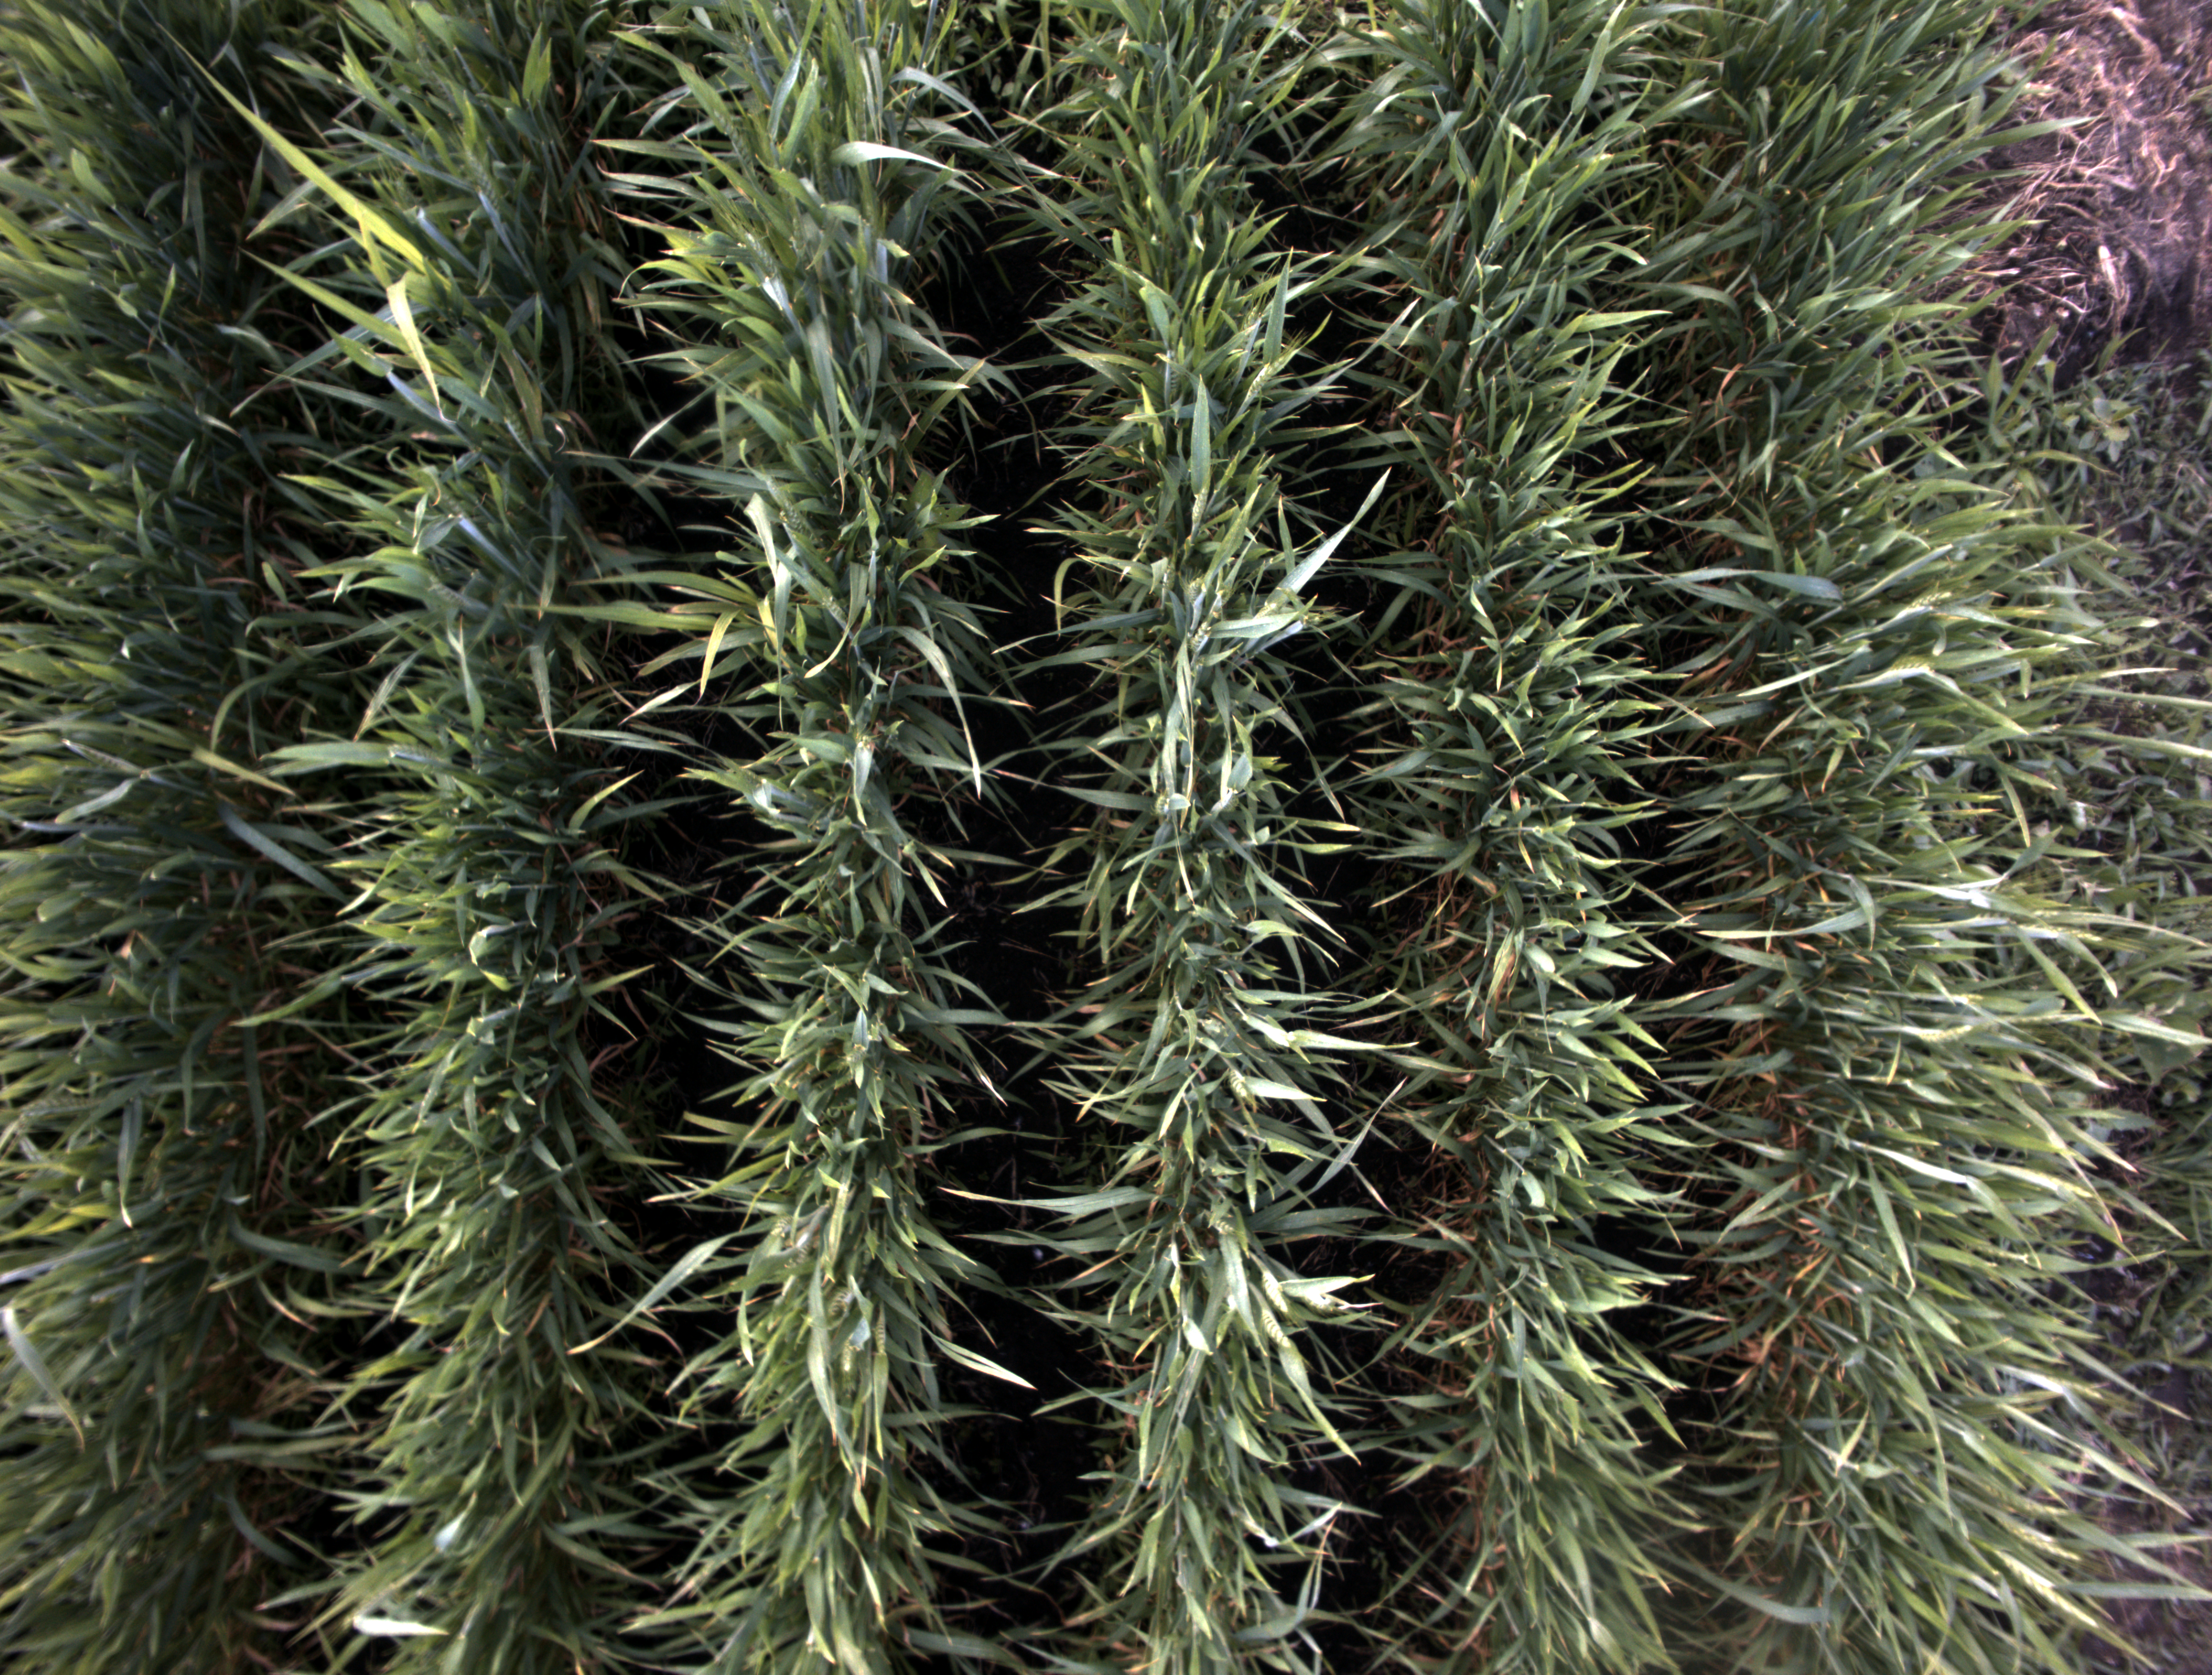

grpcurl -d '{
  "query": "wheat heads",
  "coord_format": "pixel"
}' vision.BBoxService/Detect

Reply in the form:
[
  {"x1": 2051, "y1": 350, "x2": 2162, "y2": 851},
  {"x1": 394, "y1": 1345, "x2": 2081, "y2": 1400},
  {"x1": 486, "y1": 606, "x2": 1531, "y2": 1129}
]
[
  {"x1": 865, "y1": 203, "x2": 879, "y2": 255},
  {"x1": 1154, "y1": 794, "x2": 1169, "y2": 817},
  {"x1": 1168, "y1": 349, "x2": 1181, "y2": 397},
  {"x1": 342, "y1": 1576, "x2": 399, "y2": 1626},
  {"x1": 1952, "y1": 748, "x2": 1984, "y2": 758},
  {"x1": 1263, "y1": 1030, "x2": 1291, "y2": 1047},
  {"x1": 2161, "y1": 872, "x2": 2176, "y2": 883},
  {"x1": 1303, "y1": 1284, "x2": 1326, "y2": 1308},
  {"x1": 414, "y1": 39, "x2": 450, "y2": 104},
  {"x1": 2030, "y1": 910, "x2": 2060, "y2": 917},
  {"x1": 875, "y1": 1313, "x2": 886, "y2": 1352},
  {"x1": 731, "y1": 23, "x2": 757, "y2": 74},
  {"x1": 384, "y1": 742, "x2": 439, "y2": 761},
  {"x1": 1235, "y1": 306, "x2": 1259, "y2": 349},
  {"x1": 796, "y1": 1240, "x2": 812, "y2": 1263},
  {"x1": 1184, "y1": 577, "x2": 1202, "y2": 603},
  {"x1": 821, "y1": 596, "x2": 847, "y2": 623},
  {"x1": 1955, "y1": 991, "x2": 1983, "y2": 1002},
  {"x1": 810, "y1": 145, "x2": 832, "y2": 200},
  {"x1": 712, "y1": 109, "x2": 753, "y2": 167},
  {"x1": 736, "y1": 765, "x2": 762, "y2": 785},
  {"x1": 22, "y1": 1095, "x2": 96, "y2": 1123},
  {"x1": 828, "y1": 1288, "x2": 851, "y2": 1318},
  {"x1": 768, "y1": 1211, "x2": 794, "y2": 1237},
  {"x1": 1926, "y1": 122, "x2": 1992, "y2": 167},
  {"x1": 1922, "y1": 1023, "x2": 1972, "y2": 1044},
  {"x1": 860, "y1": 734, "x2": 870, "y2": 741},
  {"x1": 783, "y1": 498, "x2": 806, "y2": 534},
  {"x1": 2020, "y1": 922, "x2": 2103, "y2": 943},
  {"x1": 1247, "y1": 557, "x2": 1275, "y2": 577},
  {"x1": 429, "y1": 572, "x2": 467, "y2": 608},
  {"x1": 439, "y1": 492, "x2": 470, "y2": 517},
  {"x1": 2008, "y1": 674, "x2": 2078, "y2": 695},
  {"x1": 1261, "y1": 1309, "x2": 1291, "y2": 1349},
  {"x1": 1220, "y1": 793, "x2": 1241, "y2": 813},
  {"x1": 1983, "y1": 1482, "x2": 2069, "y2": 1517},
  {"x1": 1998, "y1": 1517, "x2": 2082, "y2": 1561},
  {"x1": 1931, "y1": 568, "x2": 1961, "y2": 582},
  {"x1": 1566, "y1": 1346, "x2": 1590, "y2": 1384},
  {"x1": 394, "y1": 791, "x2": 437, "y2": 802},
  {"x1": 1191, "y1": 485, "x2": 1210, "y2": 526},
  {"x1": 393, "y1": 175, "x2": 413, "y2": 207},
  {"x1": 2050, "y1": 1087, "x2": 2086, "y2": 1105},
  {"x1": 846, "y1": 1046, "x2": 868, "y2": 1066},
  {"x1": 839, "y1": 1339, "x2": 855, "y2": 1372},
  {"x1": 1255, "y1": 602, "x2": 1278, "y2": 620},
  {"x1": 855, "y1": 82, "x2": 867, "y2": 142},
  {"x1": 1977, "y1": 910, "x2": 2019, "y2": 924},
  {"x1": 502, "y1": 402, "x2": 532, "y2": 457},
  {"x1": 1221, "y1": 590, "x2": 1234, "y2": 605},
  {"x1": 1160, "y1": 555, "x2": 1176, "y2": 594},
  {"x1": 1970, "y1": 1241, "x2": 2025, "y2": 1262},
  {"x1": 1891, "y1": 663, "x2": 1929, "y2": 675},
  {"x1": 820, "y1": 1029, "x2": 842, "y2": 1041},
  {"x1": 1907, "y1": 592, "x2": 1952, "y2": 610},
  {"x1": 831, "y1": 1189, "x2": 846, "y2": 1222},
  {"x1": 1247, "y1": 356, "x2": 1285, "y2": 398},
  {"x1": 1227, "y1": 1066, "x2": 1247, "y2": 1099},
  {"x1": 747, "y1": 231, "x2": 779, "y2": 277},
  {"x1": 84, "y1": 748, "x2": 125, "y2": 775},
  {"x1": 1979, "y1": 882, "x2": 2025, "y2": 895},
  {"x1": 1892, "y1": 655, "x2": 1935, "y2": 665},
  {"x1": 1998, "y1": 1013, "x2": 2067, "y2": 1030},
  {"x1": 2003, "y1": 1557, "x2": 2097, "y2": 1627},
  {"x1": 1213, "y1": 1217, "x2": 1235, "y2": 1236},
  {"x1": 2046, "y1": 1376, "x2": 2103, "y2": 1401},
  {"x1": 1261, "y1": 1269, "x2": 1288, "y2": 1314},
  {"x1": 790, "y1": 218, "x2": 806, "y2": 257},
  {"x1": 1188, "y1": 621, "x2": 1210, "y2": 652},
  {"x1": 463, "y1": 145, "x2": 499, "y2": 209},
  {"x1": 2182, "y1": 916, "x2": 2210, "y2": 934}
]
